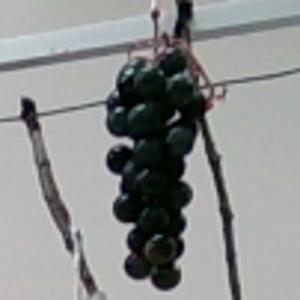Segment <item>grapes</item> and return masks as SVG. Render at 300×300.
Masks as SVG:
<instances>
[{"label": "grapes", "mask_w": 300, "mask_h": 300, "mask_svg": "<svg viewBox=\"0 0 300 300\" xmlns=\"http://www.w3.org/2000/svg\"><path fill=\"white\" fill-rule=\"evenodd\" d=\"M186 46L170 44L155 61L136 55L124 63L115 77V89L105 98L106 127L117 139L136 140L110 147L105 158L109 172L122 177L113 211L118 222L134 224L126 244L124 261L129 277L150 276L152 285L168 292L179 284L182 271L175 262L186 242L180 233L186 226L181 208L193 198L182 176L194 140L200 133L198 116L210 106L200 87L201 77L191 68Z\"/></svg>", "instance_id": "01657485"}]
</instances>
